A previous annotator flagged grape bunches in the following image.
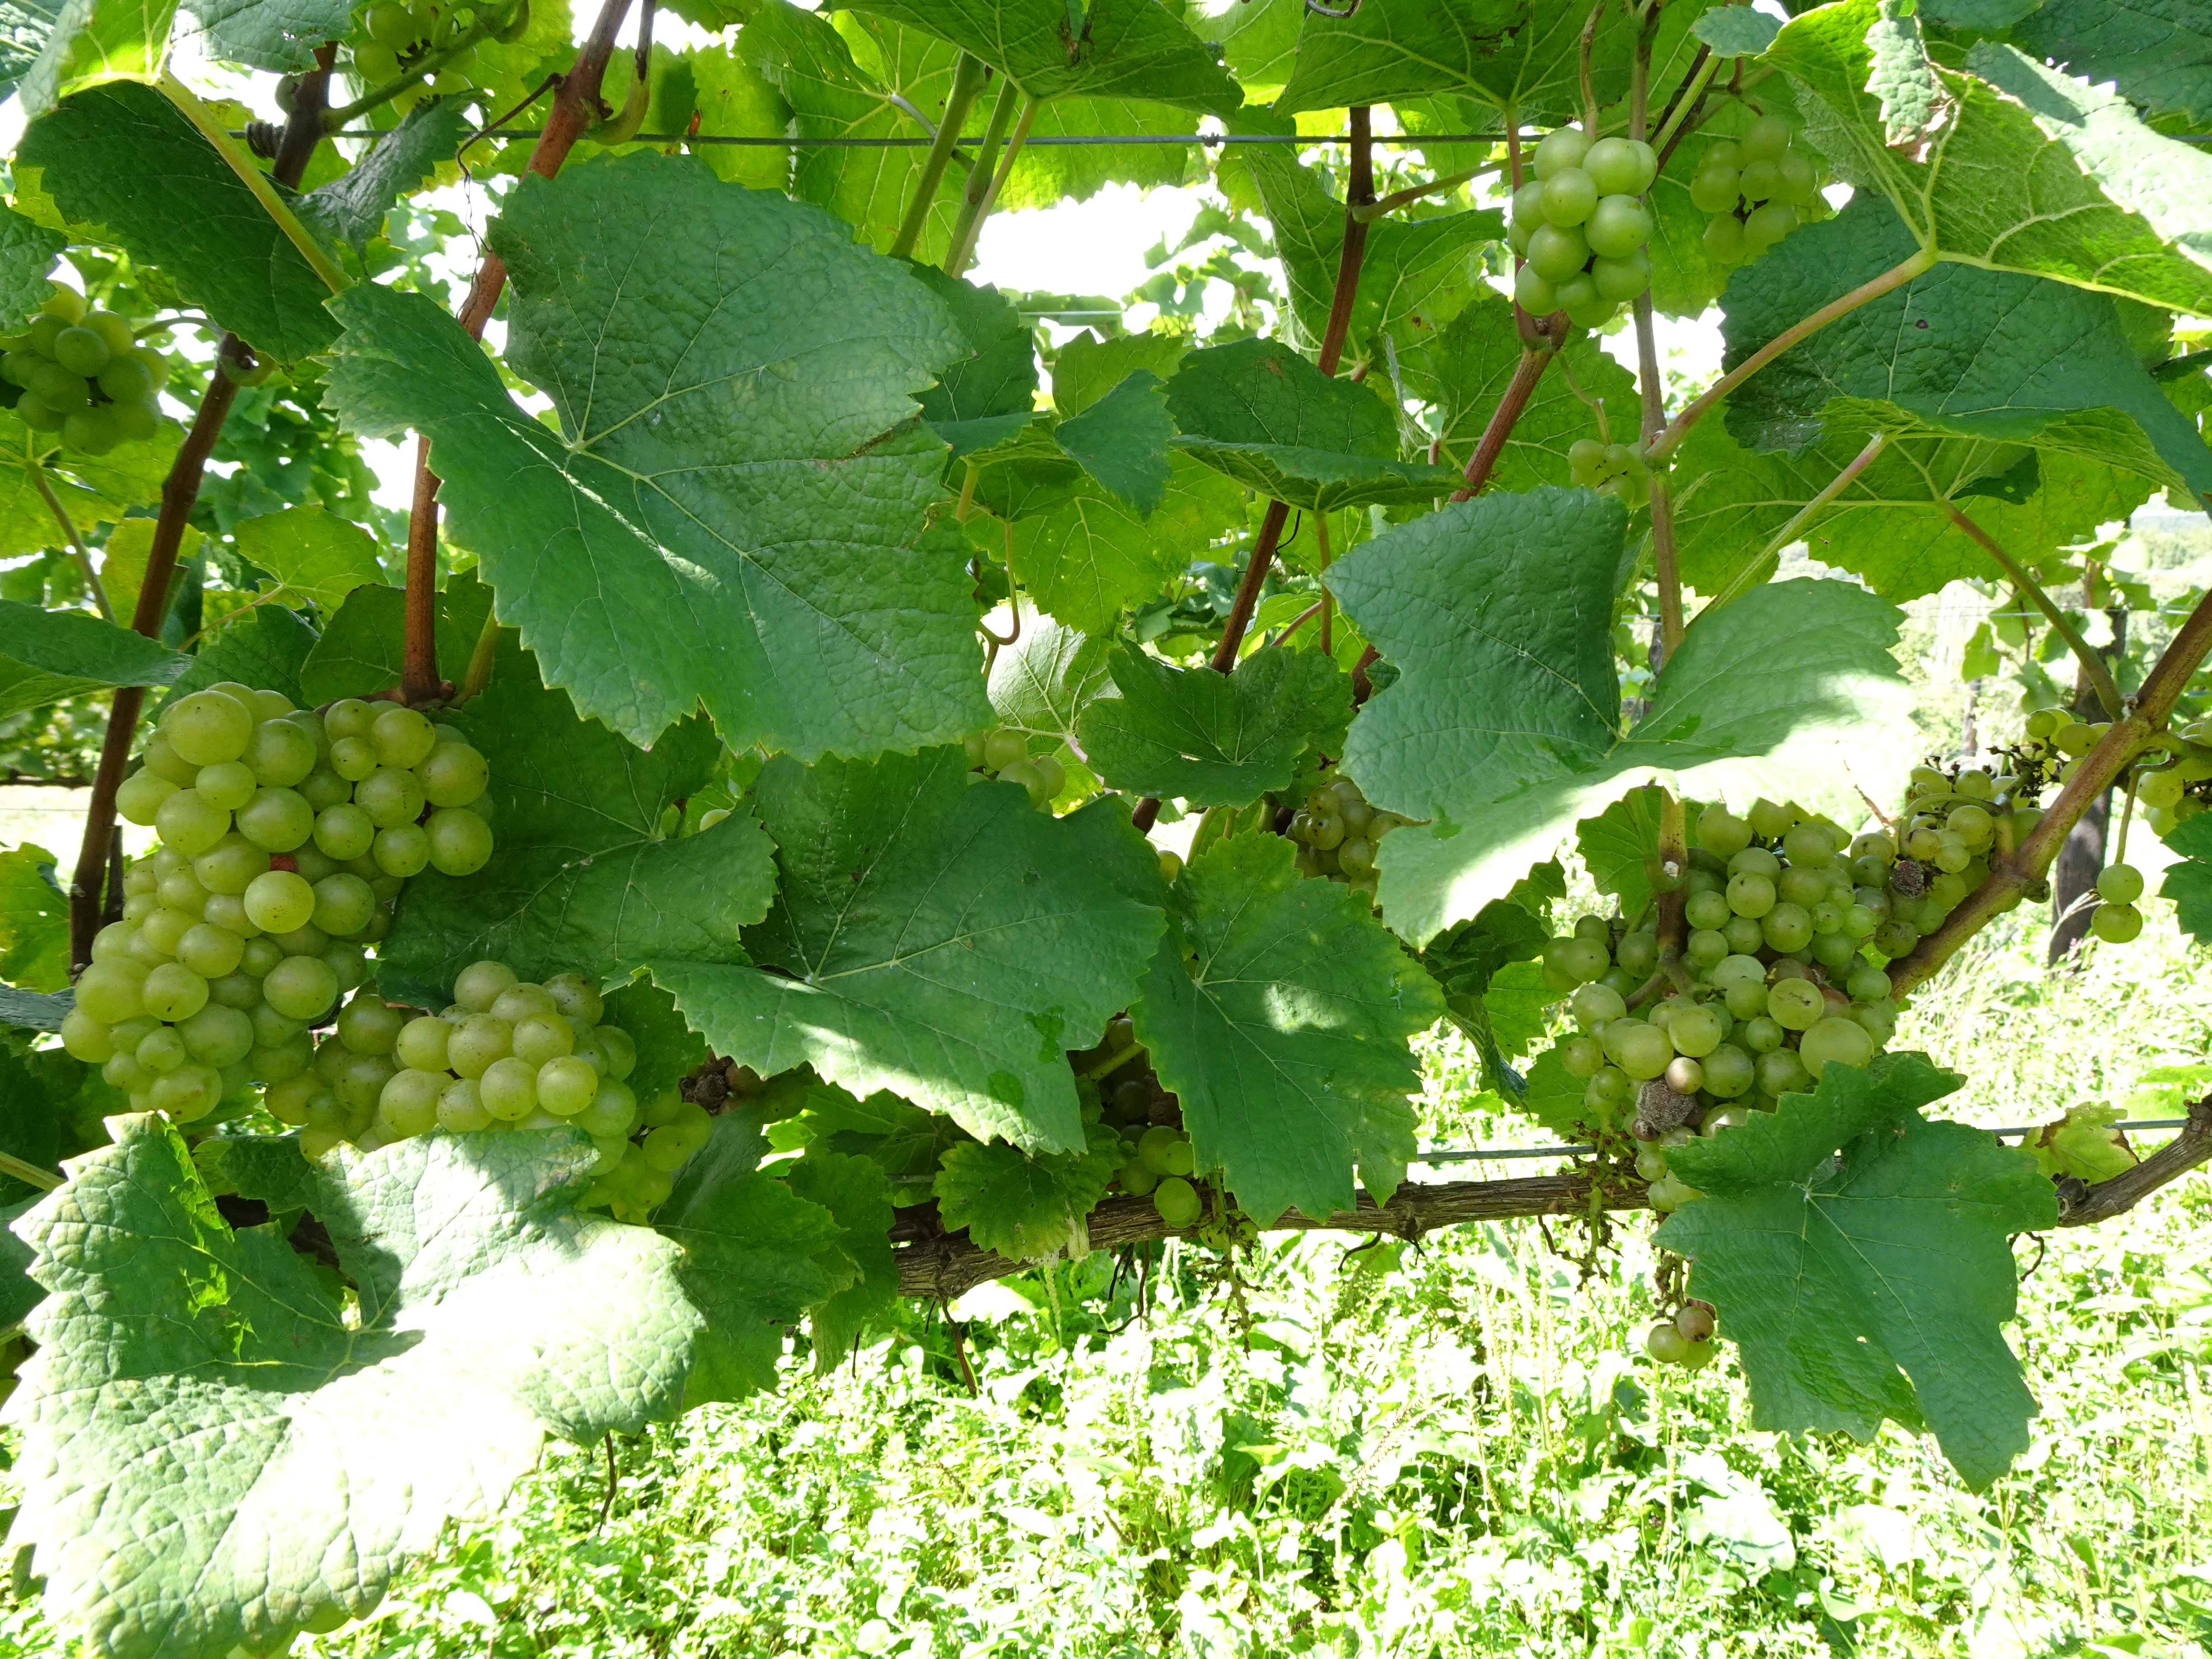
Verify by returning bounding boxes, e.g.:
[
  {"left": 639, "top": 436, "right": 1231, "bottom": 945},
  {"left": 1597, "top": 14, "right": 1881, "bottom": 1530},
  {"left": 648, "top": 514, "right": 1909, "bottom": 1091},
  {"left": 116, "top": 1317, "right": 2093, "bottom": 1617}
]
[
  {"left": 964, "top": 727, "right": 1066, "bottom": 816},
  {"left": 2091, "top": 862, "right": 2145, "bottom": 943},
  {"left": 1691, "top": 114, "right": 1819, "bottom": 264},
  {"left": 589, "top": 1084, "right": 712, "bottom": 1208},
  {"left": 0, "top": 281, "right": 170, "bottom": 457},
  {"left": 1545, "top": 915, "right": 1660, "bottom": 982},
  {"left": 1684, "top": 799, "right": 1892, "bottom": 1004},
  {"left": 1649, "top": 1304, "right": 1716, "bottom": 1371},
  {"left": 722, "top": 1060, "right": 813, "bottom": 1121},
  {"left": 1146, "top": 839, "right": 1183, "bottom": 883},
  {"left": 1561, "top": 955, "right": 1894, "bottom": 1212},
  {"left": 1286, "top": 766, "right": 1417, "bottom": 919},
  {"left": 2136, "top": 711, "right": 2211, "bottom": 837},
  {"left": 1067, "top": 1019, "right": 1182, "bottom": 1149},
  {"left": 1568, "top": 438, "right": 1652, "bottom": 508},
  {"left": 1197, "top": 1211, "right": 1259, "bottom": 1251},
  {"left": 1505, "top": 126, "right": 1660, "bottom": 328},
  {"left": 264, "top": 959, "right": 636, "bottom": 1174},
  {"left": 2024, "top": 708, "right": 2113, "bottom": 785},
  {"left": 61, "top": 682, "right": 494, "bottom": 1123},
  {"left": 1120, "top": 1126, "right": 1203, "bottom": 1229},
  {"left": 355, "top": 0, "right": 480, "bottom": 119},
  {"left": 699, "top": 809, "right": 731, "bottom": 833},
  {"left": 1850, "top": 767, "right": 2049, "bottom": 958}
]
